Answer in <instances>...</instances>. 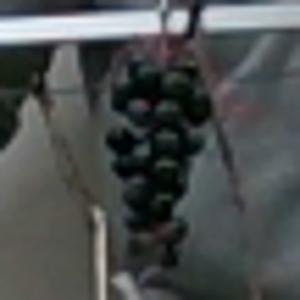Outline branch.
<instances>
[{
  "instance_id": "1",
  "label": "branch",
  "mask_w": 300,
  "mask_h": 300,
  "mask_svg": "<svg viewBox=\"0 0 300 300\" xmlns=\"http://www.w3.org/2000/svg\"><path fill=\"white\" fill-rule=\"evenodd\" d=\"M27 91L33 99L42 132L61 180L68 186L91 227L108 284L120 300H148L133 272L126 267L118 235L106 212L100 207L91 183L66 137L61 133L56 99L49 96L47 77L41 72L30 71Z\"/></svg>"
},
{
  "instance_id": "2",
  "label": "branch",
  "mask_w": 300,
  "mask_h": 300,
  "mask_svg": "<svg viewBox=\"0 0 300 300\" xmlns=\"http://www.w3.org/2000/svg\"><path fill=\"white\" fill-rule=\"evenodd\" d=\"M208 125L214 133V144L220 153L237 226L240 231V241L250 298L251 300H263L257 252L251 236V225L247 215V203L243 191L236 146L224 129L218 109Z\"/></svg>"
},
{
  "instance_id": "3",
  "label": "branch",
  "mask_w": 300,
  "mask_h": 300,
  "mask_svg": "<svg viewBox=\"0 0 300 300\" xmlns=\"http://www.w3.org/2000/svg\"><path fill=\"white\" fill-rule=\"evenodd\" d=\"M187 8V23L181 28L178 36V45L190 44L197 41L201 34V18L211 0H183Z\"/></svg>"
}]
</instances>
